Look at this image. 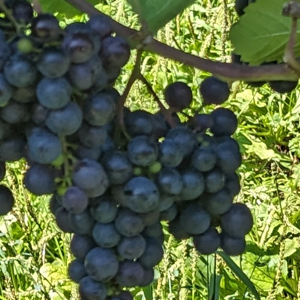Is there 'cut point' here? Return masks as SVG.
Wrapping results in <instances>:
<instances>
[{
	"label": "cut point",
	"mask_w": 300,
	"mask_h": 300,
	"mask_svg": "<svg viewBox=\"0 0 300 300\" xmlns=\"http://www.w3.org/2000/svg\"><path fill=\"white\" fill-rule=\"evenodd\" d=\"M136 79H139L140 82L144 85V87L147 89L149 94L156 101L158 107L161 110L166 111L167 106L162 103V100L160 99L159 95L153 90L151 85L148 83V81L142 75V50L141 49L136 50L135 66L133 67L131 77L129 78L127 85H126L122 95L120 96V100H119L120 105H123L125 103V99L127 98L128 94L132 88V85Z\"/></svg>",
	"instance_id": "6a23745f"
}]
</instances>
